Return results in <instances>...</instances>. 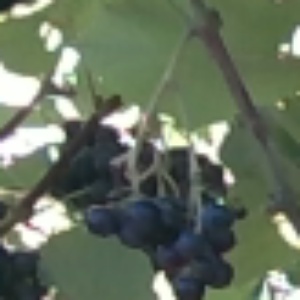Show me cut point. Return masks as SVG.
<instances>
[{"instance_id": "cut-point-1", "label": "cut point", "mask_w": 300, "mask_h": 300, "mask_svg": "<svg viewBox=\"0 0 300 300\" xmlns=\"http://www.w3.org/2000/svg\"><path fill=\"white\" fill-rule=\"evenodd\" d=\"M190 38H191V34L187 30H184L178 40V44H177V47H176L173 55L170 57L168 63L166 64V67L164 68L163 72L160 74V77L158 78V80L156 82L154 90L152 91V94L149 98L145 112L141 118V123L135 131V134L137 136H144L146 134V131H145L146 127H147L148 123L150 122L151 117L154 114L155 108L158 105L159 97L163 93V90L166 86L167 88L170 89V91L177 103L179 113H180L183 123L185 125V135H186V139L188 142V146L190 148H194L196 146L192 122L186 111V107H185L184 101L181 97V94H180L178 88L176 87V85L172 82V71L175 68V66H176L182 52L184 51L185 47L187 46V43L190 40Z\"/></svg>"}]
</instances>
